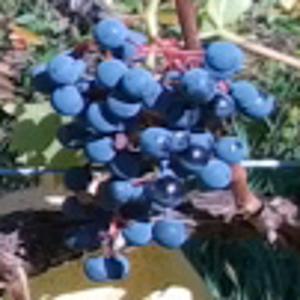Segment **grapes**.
Instances as JSON below:
<instances>
[{
  "label": "grapes",
  "instance_id": "grapes-2",
  "mask_svg": "<svg viewBox=\"0 0 300 300\" xmlns=\"http://www.w3.org/2000/svg\"><path fill=\"white\" fill-rule=\"evenodd\" d=\"M83 273L93 284H119L130 279L132 268L129 259L123 255H108L104 259L91 257L83 265Z\"/></svg>",
  "mask_w": 300,
  "mask_h": 300
},
{
  "label": "grapes",
  "instance_id": "grapes-1",
  "mask_svg": "<svg viewBox=\"0 0 300 300\" xmlns=\"http://www.w3.org/2000/svg\"><path fill=\"white\" fill-rule=\"evenodd\" d=\"M98 48L114 52L93 71L101 99L87 93L92 81L87 65L68 51L32 70V84L50 93L49 107L62 118L58 141L70 151L81 149L87 160L108 170L91 176L77 166L63 177L60 216L73 224L63 231L69 251H93L111 224L123 227L122 244L163 252H179L187 228L175 219L186 193L216 194L233 183L232 163L245 157V139L215 136L202 130L208 118L228 121L237 112L255 122L272 119L277 100L248 80L230 83L244 55L225 40L206 44L204 51H185L176 41L148 43L146 34L128 30L114 16L100 18L94 28Z\"/></svg>",
  "mask_w": 300,
  "mask_h": 300
}]
</instances>
